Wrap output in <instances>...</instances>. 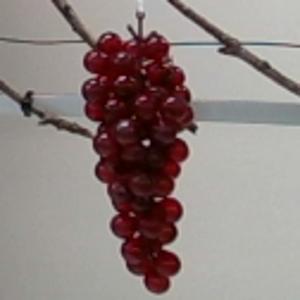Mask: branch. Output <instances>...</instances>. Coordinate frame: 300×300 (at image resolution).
<instances>
[{"mask_svg": "<svg viewBox=\"0 0 300 300\" xmlns=\"http://www.w3.org/2000/svg\"><path fill=\"white\" fill-rule=\"evenodd\" d=\"M165 1L169 6L177 10L179 14H182L183 17L190 20L191 23L223 45V47L217 48L216 53L248 64L278 87L286 89L293 96L300 98V84L298 82L283 75L280 70L274 68L266 59H260L258 56L250 53L238 38L225 33L181 0Z\"/></svg>", "mask_w": 300, "mask_h": 300, "instance_id": "branch-1", "label": "branch"}, {"mask_svg": "<svg viewBox=\"0 0 300 300\" xmlns=\"http://www.w3.org/2000/svg\"><path fill=\"white\" fill-rule=\"evenodd\" d=\"M0 95H4L12 100L18 107L24 118H31L35 115L40 121H37V127L54 126L57 132H67L71 135L93 140L96 133L69 119L62 118L48 109H40L35 106V91L25 90L24 96H21L12 89L2 78H0Z\"/></svg>", "mask_w": 300, "mask_h": 300, "instance_id": "branch-2", "label": "branch"}, {"mask_svg": "<svg viewBox=\"0 0 300 300\" xmlns=\"http://www.w3.org/2000/svg\"><path fill=\"white\" fill-rule=\"evenodd\" d=\"M56 8L61 17L67 22L73 34L85 41L86 45L91 49L97 48L96 38L90 33L89 29L82 23L80 16L74 10L67 0H49Z\"/></svg>", "mask_w": 300, "mask_h": 300, "instance_id": "branch-3", "label": "branch"}, {"mask_svg": "<svg viewBox=\"0 0 300 300\" xmlns=\"http://www.w3.org/2000/svg\"><path fill=\"white\" fill-rule=\"evenodd\" d=\"M184 130H187L190 134L194 136H198L197 131L199 130V124H196L194 121L192 122L191 125L186 127Z\"/></svg>", "mask_w": 300, "mask_h": 300, "instance_id": "branch-4", "label": "branch"}]
</instances>
